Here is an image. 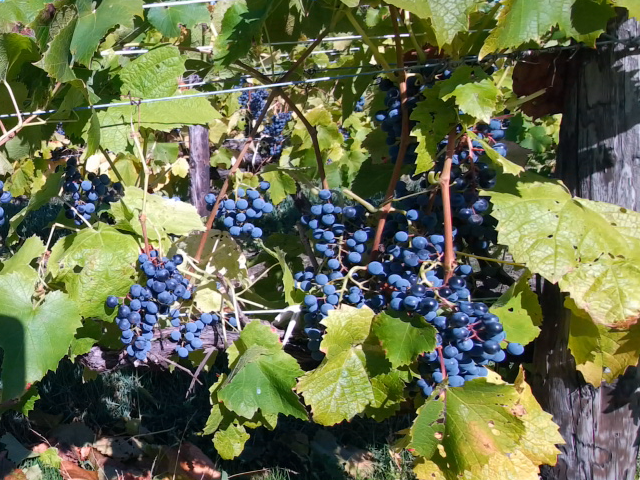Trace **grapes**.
<instances>
[{"label":"grapes","instance_id":"01657485","mask_svg":"<svg viewBox=\"0 0 640 480\" xmlns=\"http://www.w3.org/2000/svg\"><path fill=\"white\" fill-rule=\"evenodd\" d=\"M472 267L460 264L454 268L458 276L448 281L450 289L442 288L439 295L452 304H457V309L449 317L437 316L438 301L432 291L418 282V275L411 270L403 272L399 263L385 260L371 261L368 264L370 275H381L386 282L396 290L391 292L389 306L392 310L403 312H415L425 317L428 323L442 330L436 335V344L445 346L442 349L444 356L445 372L448 376L449 387H463L465 382H470L475 377H485L489 373L486 367L491 359L494 362H503L507 354L500 348L499 342L506 338V331L500 323L497 315H492L485 303L468 300L471 291L466 288L467 277ZM481 321L486 325L485 341L483 344L475 339H470L472 331L466 327Z\"/></svg>","mask_w":640,"mask_h":480},{"label":"grapes","instance_id":"b958b902","mask_svg":"<svg viewBox=\"0 0 640 480\" xmlns=\"http://www.w3.org/2000/svg\"><path fill=\"white\" fill-rule=\"evenodd\" d=\"M163 262L155 267L152 260L146 253L138 255L141 271L146 274L148 280L146 286L143 287L138 283H134L128 287L129 293L136 297L132 299L129 305L122 304L118 309V316L115 321L122 330L120 343L127 346L129 356H135L139 361L146 359L148 351L152 347L153 325L157 324V313L160 315H168L170 325L179 327L180 310L173 308L169 310V306L180 299H189L191 291L187 289L190 281L184 278V275L176 270V266L184 263L181 254H175L172 259L161 256ZM131 324L137 327H143L142 335L134 339V344H130L134 337V331L130 329Z\"/></svg>","mask_w":640,"mask_h":480},{"label":"grapes","instance_id":"0513c4c2","mask_svg":"<svg viewBox=\"0 0 640 480\" xmlns=\"http://www.w3.org/2000/svg\"><path fill=\"white\" fill-rule=\"evenodd\" d=\"M344 273L342 271H332L330 274L326 275L323 271H318L314 274L313 267H307L305 270H299L294 274V287L297 288V283H299V287L303 291H308L312 288L311 281H314L322 285V292L326 294L325 302L321 305L319 309V299L315 295L307 294L304 297V303L309 311L304 316V327L303 331L306 333L308 337L315 338L319 340L321 338V334L325 331V328L318 324L319 320H322L324 317L329 315L328 310H333L335 305L340 301V292H335L337 287L335 284H327L332 279H338L339 277H343Z\"/></svg>","mask_w":640,"mask_h":480},{"label":"grapes","instance_id":"84f90ec7","mask_svg":"<svg viewBox=\"0 0 640 480\" xmlns=\"http://www.w3.org/2000/svg\"><path fill=\"white\" fill-rule=\"evenodd\" d=\"M237 194L240 199L237 203L234 199L223 198L222 205L217 213V219H220L222 215H225L228 211L230 217L223 219V225L228 227L229 236L237 238L245 235L246 237H252L259 239L262 236V228L255 227L252 223H246L242 226H238V223H244L247 218L260 219L263 213H272L274 211V205L271 202L265 201L259 198L260 192L253 191L250 188L246 189V195L252 200V207H248V200L245 197V190L243 187L237 189Z\"/></svg>","mask_w":640,"mask_h":480},{"label":"grapes","instance_id":"f8a65327","mask_svg":"<svg viewBox=\"0 0 640 480\" xmlns=\"http://www.w3.org/2000/svg\"><path fill=\"white\" fill-rule=\"evenodd\" d=\"M309 213L314 216H319L324 213V215L321 217V222L325 226H331V231H326L325 229L319 228L320 221L318 219L311 220V217L309 215H302L300 217V222L303 225H308V227L313 230V237L316 240L325 239L329 243H334L336 241L335 235H342L345 232V225L343 223H335L336 217L333 215V213L343 214L345 218L357 217L356 208L344 207L342 209L340 206H334L332 203H324L323 205H310Z\"/></svg>","mask_w":640,"mask_h":480},{"label":"grapes","instance_id":"5460f4e3","mask_svg":"<svg viewBox=\"0 0 640 480\" xmlns=\"http://www.w3.org/2000/svg\"><path fill=\"white\" fill-rule=\"evenodd\" d=\"M444 236L442 234H430L426 236H416L411 243L412 248H401L399 244L391 243L385 247L388 254H393L395 259H400L407 266L417 268L420 261H426L432 257V252L428 250V243L432 244L439 253L444 251Z\"/></svg>","mask_w":640,"mask_h":480},{"label":"grapes","instance_id":"83cd7487","mask_svg":"<svg viewBox=\"0 0 640 480\" xmlns=\"http://www.w3.org/2000/svg\"><path fill=\"white\" fill-rule=\"evenodd\" d=\"M218 320L219 317L217 315H211L208 312H203L200 314V320H197L194 323H185L184 329L186 330V333L184 334V338L189 342V344H185L184 347L181 345H177L175 347V351L178 356L180 358H186L189 353L194 351V349H202L204 347V342L200 337L202 330L205 328V324H211Z\"/></svg>","mask_w":640,"mask_h":480},{"label":"grapes","instance_id":"e5b3c951","mask_svg":"<svg viewBox=\"0 0 640 480\" xmlns=\"http://www.w3.org/2000/svg\"><path fill=\"white\" fill-rule=\"evenodd\" d=\"M372 233L371 227H365L361 230H357L352 233V238L346 240V245L350 248V252L347 254V261L349 263L361 264L363 262L364 252L366 251L365 243L369 239V235Z\"/></svg>","mask_w":640,"mask_h":480},{"label":"grapes","instance_id":"2adb6a1f","mask_svg":"<svg viewBox=\"0 0 640 480\" xmlns=\"http://www.w3.org/2000/svg\"><path fill=\"white\" fill-rule=\"evenodd\" d=\"M344 299L353 304L355 308H362L364 305L368 307H382L387 303V299L382 294H375L372 300L368 297H364V291L359 286H352L349 289V294L344 296Z\"/></svg>","mask_w":640,"mask_h":480},{"label":"grapes","instance_id":"ef6de9ee","mask_svg":"<svg viewBox=\"0 0 640 480\" xmlns=\"http://www.w3.org/2000/svg\"><path fill=\"white\" fill-rule=\"evenodd\" d=\"M489 208V201L486 198H480L472 204L471 207H463L459 210V216L472 228H480L484 224V216L476 214L477 212H485Z\"/></svg>","mask_w":640,"mask_h":480},{"label":"grapes","instance_id":"1ff8f66d","mask_svg":"<svg viewBox=\"0 0 640 480\" xmlns=\"http://www.w3.org/2000/svg\"><path fill=\"white\" fill-rule=\"evenodd\" d=\"M63 208L65 209V218L67 220H72L76 226H81L83 224V219L76 214V211L80 213L86 220H90L92 217V213L95 212V204L94 203H85L82 205L75 204L74 209L68 205L64 204Z\"/></svg>","mask_w":640,"mask_h":480},{"label":"grapes","instance_id":"54f908b8","mask_svg":"<svg viewBox=\"0 0 640 480\" xmlns=\"http://www.w3.org/2000/svg\"><path fill=\"white\" fill-rule=\"evenodd\" d=\"M503 122L497 119H490L489 126L487 124H480L478 130L482 133L478 134L480 139L485 137L484 133L491 134L494 139H503L505 137V130L502 129Z\"/></svg>","mask_w":640,"mask_h":480},{"label":"grapes","instance_id":"91a60905","mask_svg":"<svg viewBox=\"0 0 640 480\" xmlns=\"http://www.w3.org/2000/svg\"><path fill=\"white\" fill-rule=\"evenodd\" d=\"M400 108L401 103L399 101L392 102L388 112L386 110H380L375 114V121L377 123H383L388 120L396 121L399 118Z\"/></svg>","mask_w":640,"mask_h":480},{"label":"grapes","instance_id":"dcf779d0","mask_svg":"<svg viewBox=\"0 0 640 480\" xmlns=\"http://www.w3.org/2000/svg\"><path fill=\"white\" fill-rule=\"evenodd\" d=\"M81 190L88 192L87 199L92 202H96L100 198V193L98 191H93V183L91 180H84L81 183Z\"/></svg>","mask_w":640,"mask_h":480},{"label":"grapes","instance_id":"802abce8","mask_svg":"<svg viewBox=\"0 0 640 480\" xmlns=\"http://www.w3.org/2000/svg\"><path fill=\"white\" fill-rule=\"evenodd\" d=\"M436 274L437 271L435 269H429L425 272V277L431 286L440 287L444 284V280L439 278Z\"/></svg>","mask_w":640,"mask_h":480},{"label":"grapes","instance_id":"012428b0","mask_svg":"<svg viewBox=\"0 0 640 480\" xmlns=\"http://www.w3.org/2000/svg\"><path fill=\"white\" fill-rule=\"evenodd\" d=\"M66 189L73 192L72 201L76 202L80 198V185L73 180H69L66 182Z\"/></svg>","mask_w":640,"mask_h":480},{"label":"grapes","instance_id":"9fbda902","mask_svg":"<svg viewBox=\"0 0 640 480\" xmlns=\"http://www.w3.org/2000/svg\"><path fill=\"white\" fill-rule=\"evenodd\" d=\"M315 248L319 253L325 254L326 257H333L335 255V250L330 249L328 244L316 243Z\"/></svg>","mask_w":640,"mask_h":480}]
</instances>
